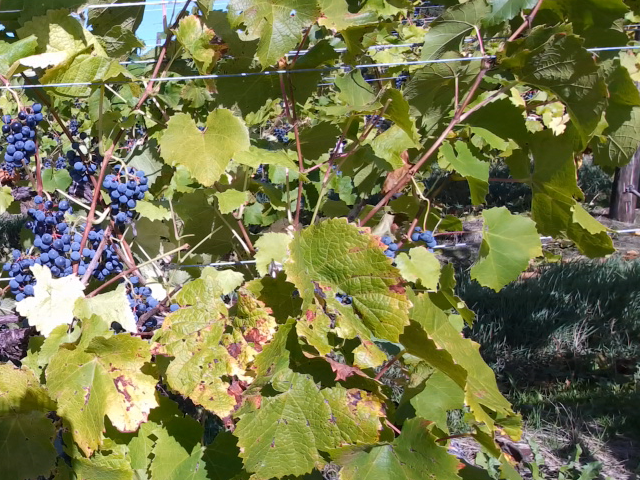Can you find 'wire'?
<instances>
[{"instance_id": "obj_1", "label": "wire", "mask_w": 640, "mask_h": 480, "mask_svg": "<svg viewBox=\"0 0 640 480\" xmlns=\"http://www.w3.org/2000/svg\"><path fill=\"white\" fill-rule=\"evenodd\" d=\"M350 69L351 65L348 63H341L336 65L318 66L313 68H294L283 70H271V71H254V72H233V73H214L203 75H182V76H163L148 79H136L127 81H92V82H72V83H54V84H40L34 83L32 86L20 85L10 86L14 91L33 90L38 89H57V88H74V87H95V86H129L138 84H151L162 82H177L184 80H205L216 78H236V77H256V76H271V75H285V74H297V73H315L328 70Z\"/></svg>"}, {"instance_id": "obj_2", "label": "wire", "mask_w": 640, "mask_h": 480, "mask_svg": "<svg viewBox=\"0 0 640 480\" xmlns=\"http://www.w3.org/2000/svg\"><path fill=\"white\" fill-rule=\"evenodd\" d=\"M497 58L496 54L485 55L484 57H466L461 56L457 58H431V59H413L405 62H382V63H366L356 64V69H369V68H384V67H408L415 64H433V63H459V62H471V61H484L494 60Z\"/></svg>"}, {"instance_id": "obj_3", "label": "wire", "mask_w": 640, "mask_h": 480, "mask_svg": "<svg viewBox=\"0 0 640 480\" xmlns=\"http://www.w3.org/2000/svg\"><path fill=\"white\" fill-rule=\"evenodd\" d=\"M255 260H230V261H215L208 262L202 264H192V265H184V264H165V269H182V270H194V269H204L210 267H225L232 265H255Z\"/></svg>"}]
</instances>
